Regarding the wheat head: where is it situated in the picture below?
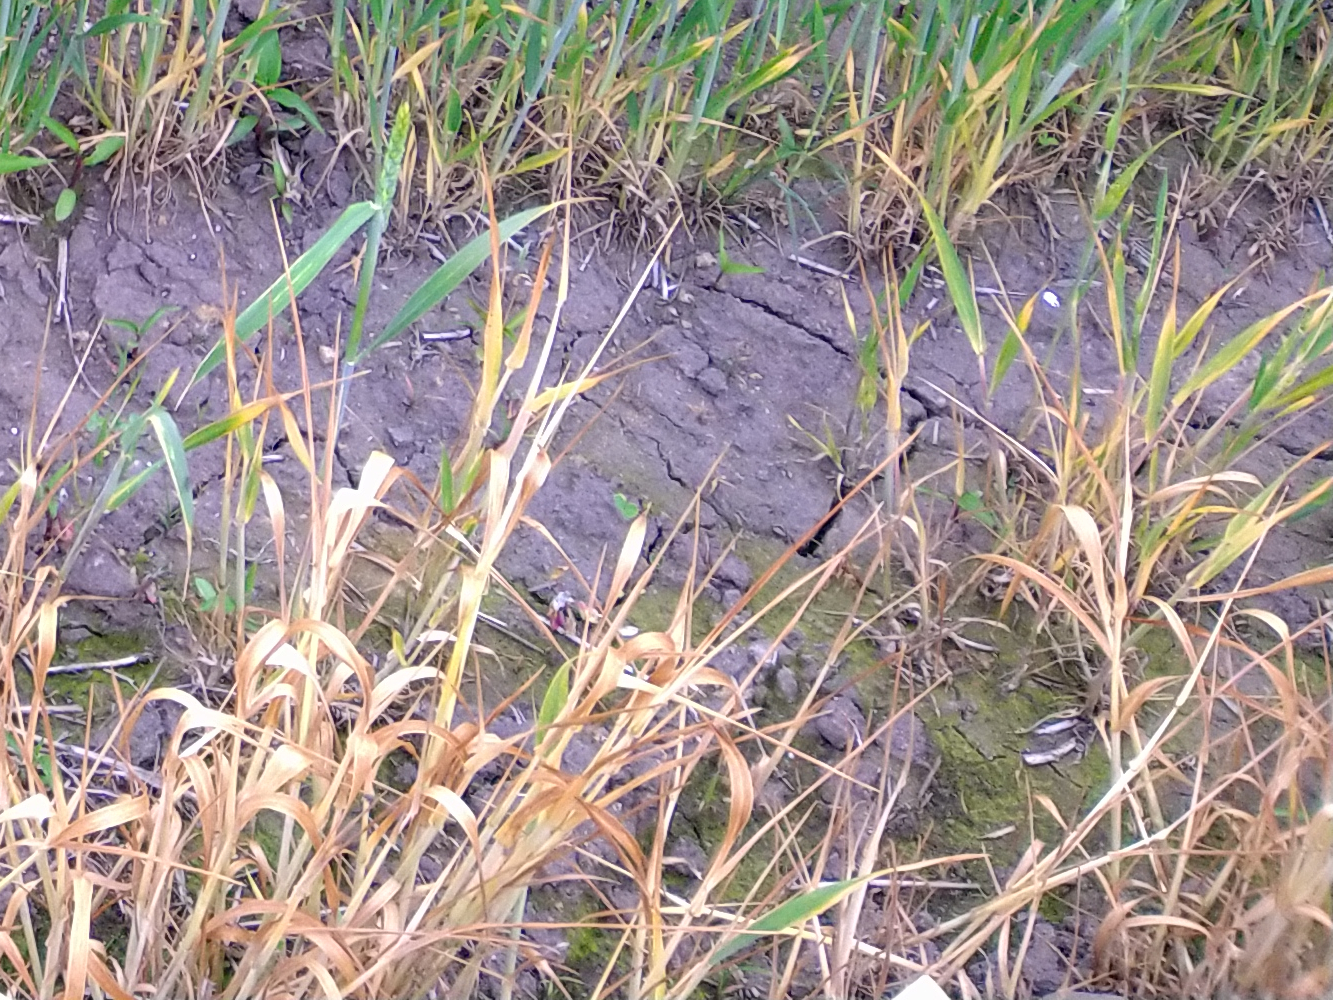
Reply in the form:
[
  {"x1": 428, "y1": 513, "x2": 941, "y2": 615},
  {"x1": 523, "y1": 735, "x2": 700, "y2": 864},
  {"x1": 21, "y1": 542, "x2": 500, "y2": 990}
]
[{"x1": 380, "y1": 104, "x2": 411, "y2": 205}]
